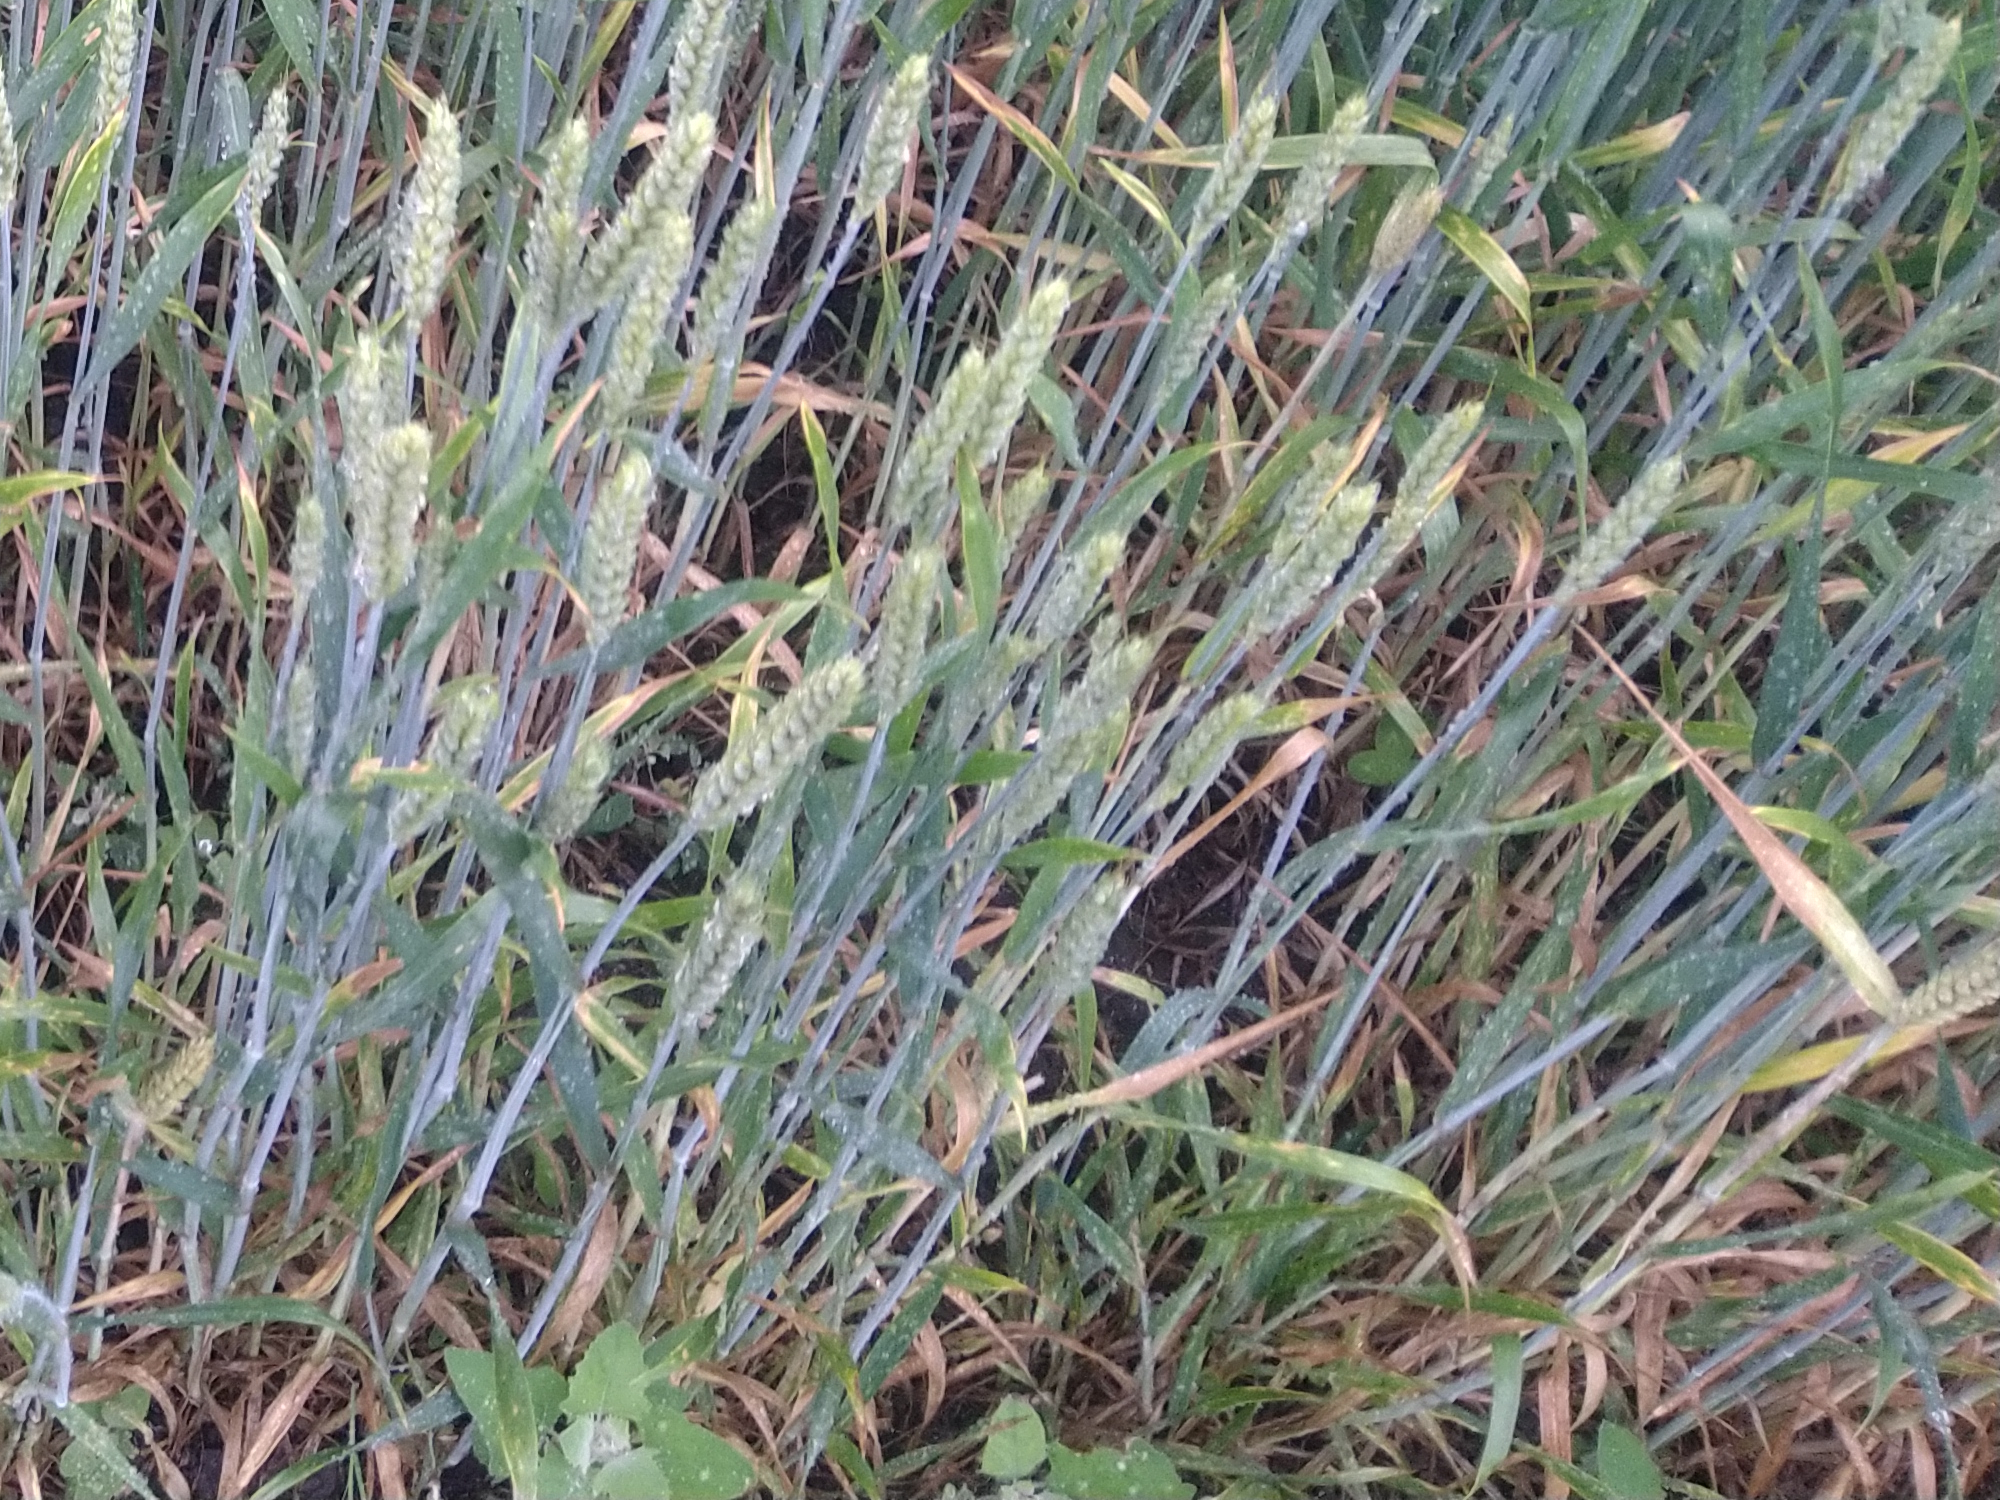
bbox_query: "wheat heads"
[672,0,735,110]
[701,202,769,364]
[344,337,385,487]
[1170,270,1235,400]
[241,91,291,197]
[874,544,944,714]
[299,497,328,604]
[524,123,589,272]
[357,424,437,583]
[386,688,501,847]
[1046,645,1158,730]
[994,709,1107,844]
[566,108,714,324]
[1822,18,1955,209]
[1475,118,1512,189]
[603,223,694,415]
[101,0,137,123]
[1550,453,1684,620]
[992,478,1044,567]
[1036,539,1127,648]
[1394,405,1486,534]
[856,60,929,204]
[979,283,1077,466]
[1375,183,1446,277]
[1269,440,1358,568]
[0,26,12,204]
[1180,701,1256,787]
[573,453,654,640]
[288,659,320,787]
[1882,946,2000,1025]
[542,756,613,834]
[390,100,458,309]
[1046,886,1125,980]
[668,868,769,1022]
[1190,99,1271,235]
[1264,489,1381,619]
[704,658,864,813]
[1273,97,1370,280]
[134,1038,208,1123]
[895,345,987,530]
